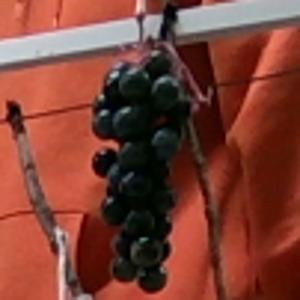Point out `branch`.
<instances>
[{
    "label": "branch",
    "mask_w": 300,
    "mask_h": 300,
    "mask_svg": "<svg viewBox=\"0 0 300 300\" xmlns=\"http://www.w3.org/2000/svg\"><path fill=\"white\" fill-rule=\"evenodd\" d=\"M5 122H7L11 131V140L17 147V164L23 179L27 200L32 207L41 231L48 240L51 254L57 257L63 267L64 285L67 286L73 300H88L83 293L80 282L75 276L72 262L54 217V211L51 210L46 199V192L41 184L37 161L30 144L22 106L17 99L6 98Z\"/></svg>",
    "instance_id": "branch-1"
},
{
    "label": "branch",
    "mask_w": 300,
    "mask_h": 300,
    "mask_svg": "<svg viewBox=\"0 0 300 300\" xmlns=\"http://www.w3.org/2000/svg\"><path fill=\"white\" fill-rule=\"evenodd\" d=\"M188 123L191 134L189 152L193 159L194 171L200 189L202 210L207 224V241L213 271V288L216 293V300H227L225 279L223 278L217 203L193 119L191 118Z\"/></svg>",
    "instance_id": "branch-2"
},
{
    "label": "branch",
    "mask_w": 300,
    "mask_h": 300,
    "mask_svg": "<svg viewBox=\"0 0 300 300\" xmlns=\"http://www.w3.org/2000/svg\"><path fill=\"white\" fill-rule=\"evenodd\" d=\"M183 0H167L161 10L160 27L158 29L154 49L166 48L175 50V28L180 22V7Z\"/></svg>",
    "instance_id": "branch-3"
}]
</instances>
